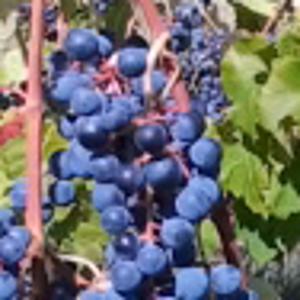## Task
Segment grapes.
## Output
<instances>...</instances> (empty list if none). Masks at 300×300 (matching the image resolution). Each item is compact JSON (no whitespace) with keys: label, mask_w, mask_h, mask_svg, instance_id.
<instances>
[{"label":"grapes","mask_w":300,"mask_h":300,"mask_svg":"<svg viewBox=\"0 0 300 300\" xmlns=\"http://www.w3.org/2000/svg\"><path fill=\"white\" fill-rule=\"evenodd\" d=\"M27 195L28 186L17 182L10 189L9 207L0 208V300L19 299L15 282L32 249V236L22 224Z\"/></svg>","instance_id":"grapes-2"},{"label":"grapes","mask_w":300,"mask_h":300,"mask_svg":"<svg viewBox=\"0 0 300 300\" xmlns=\"http://www.w3.org/2000/svg\"><path fill=\"white\" fill-rule=\"evenodd\" d=\"M49 59L54 77L41 89L44 111L59 115L55 135L66 148L47 154L55 181L41 204L50 224L57 206L79 197L76 180L90 179L92 208L102 215L105 275L77 288L53 279L49 300H259L232 264L198 265L196 223L220 201L217 179L225 147L207 136L208 122L178 108L155 69L142 96L149 42L125 37L119 46L90 27L66 32Z\"/></svg>","instance_id":"grapes-1"}]
</instances>
